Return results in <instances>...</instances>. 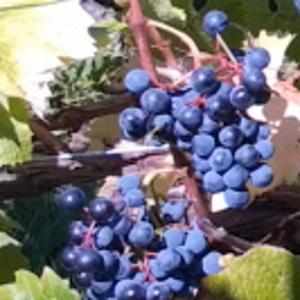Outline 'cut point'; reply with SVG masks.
<instances>
[{
    "label": "cut point",
    "mask_w": 300,
    "mask_h": 300,
    "mask_svg": "<svg viewBox=\"0 0 300 300\" xmlns=\"http://www.w3.org/2000/svg\"><path fill=\"white\" fill-rule=\"evenodd\" d=\"M146 21L148 25L162 29L170 33L172 36H175L182 40L185 43V45L189 47L196 61H198L201 58V51L199 47L194 42V40L191 37H189L185 32H182L180 29L174 28L165 22H161L160 20L154 17L146 16Z\"/></svg>",
    "instance_id": "obj_1"
},
{
    "label": "cut point",
    "mask_w": 300,
    "mask_h": 300,
    "mask_svg": "<svg viewBox=\"0 0 300 300\" xmlns=\"http://www.w3.org/2000/svg\"><path fill=\"white\" fill-rule=\"evenodd\" d=\"M172 173L178 174L176 167H172L169 169L155 168L152 170H148L145 174V177L142 179V186L147 187L149 185V183L160 174H172Z\"/></svg>",
    "instance_id": "obj_2"
}]
</instances>
